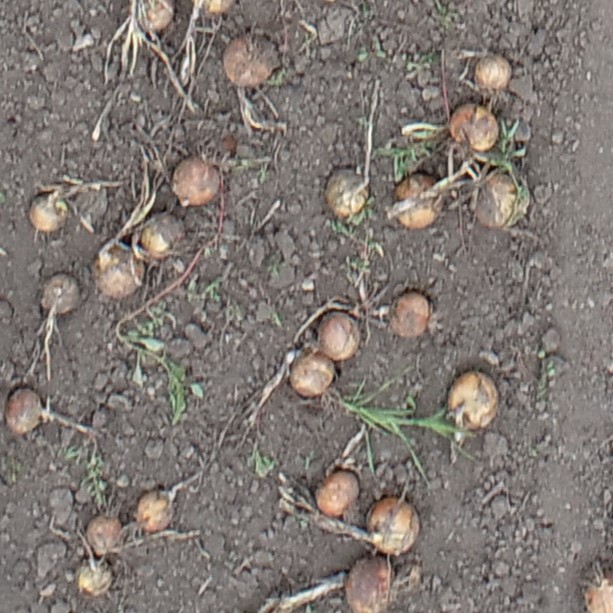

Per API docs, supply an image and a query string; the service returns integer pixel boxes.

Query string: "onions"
[584,570,613,613]
[28,191,66,230]
[75,559,109,594]
[85,513,122,553]
[447,373,497,428]
[474,174,527,227]
[450,106,497,151]
[224,33,275,87]
[93,246,138,297]
[316,312,357,359]
[202,0,233,16]
[315,469,359,516]
[396,176,439,229]
[388,291,433,339]
[138,217,179,256]
[135,489,171,528]
[323,170,368,217]
[472,53,510,89]
[136,1,173,34]
[4,386,41,435]
[367,499,417,552]
[38,274,79,311]
[345,558,392,613]
[289,352,333,397]
[170,157,219,204]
